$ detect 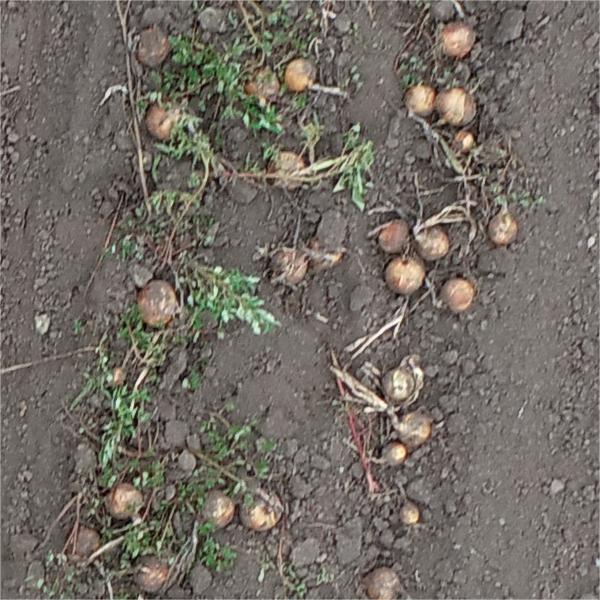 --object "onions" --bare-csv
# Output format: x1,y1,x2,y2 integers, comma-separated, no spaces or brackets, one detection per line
279,57,314,90
63,521,99,560
453,129,475,149
381,440,405,465
375,217,410,252
132,552,172,589
144,104,176,140
132,28,169,66
136,280,177,325
382,365,420,401
199,491,234,528
105,481,141,519
438,21,473,56
269,154,304,188
405,82,434,114
437,275,473,311
245,73,275,99
486,211,518,244
314,242,342,268
398,502,420,525
240,488,280,529
384,253,423,292
416,226,449,260
394,409,432,448
360,565,399,597
435,86,470,123
280,248,307,283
